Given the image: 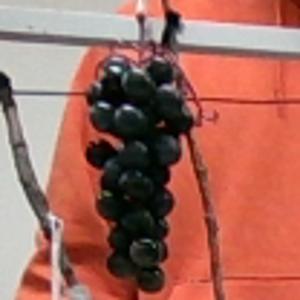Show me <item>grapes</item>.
<instances>
[{"mask_svg":"<svg viewBox=\"0 0 300 300\" xmlns=\"http://www.w3.org/2000/svg\"><path fill=\"white\" fill-rule=\"evenodd\" d=\"M102 75L83 92L88 124L95 133L113 137L119 148L95 136L83 157L103 172L93 198L96 215L115 225L105 236L112 251L106 267L114 279L132 276L141 292L157 295L167 285L162 266L170 256L167 217L177 208L168 186L171 167L183 156L181 135L193 128L195 112L185 92L172 88L176 67L162 55L149 58L143 68L134 67L127 55H114Z\"/></svg>","mask_w":300,"mask_h":300,"instance_id":"1","label":"grapes"}]
</instances>
